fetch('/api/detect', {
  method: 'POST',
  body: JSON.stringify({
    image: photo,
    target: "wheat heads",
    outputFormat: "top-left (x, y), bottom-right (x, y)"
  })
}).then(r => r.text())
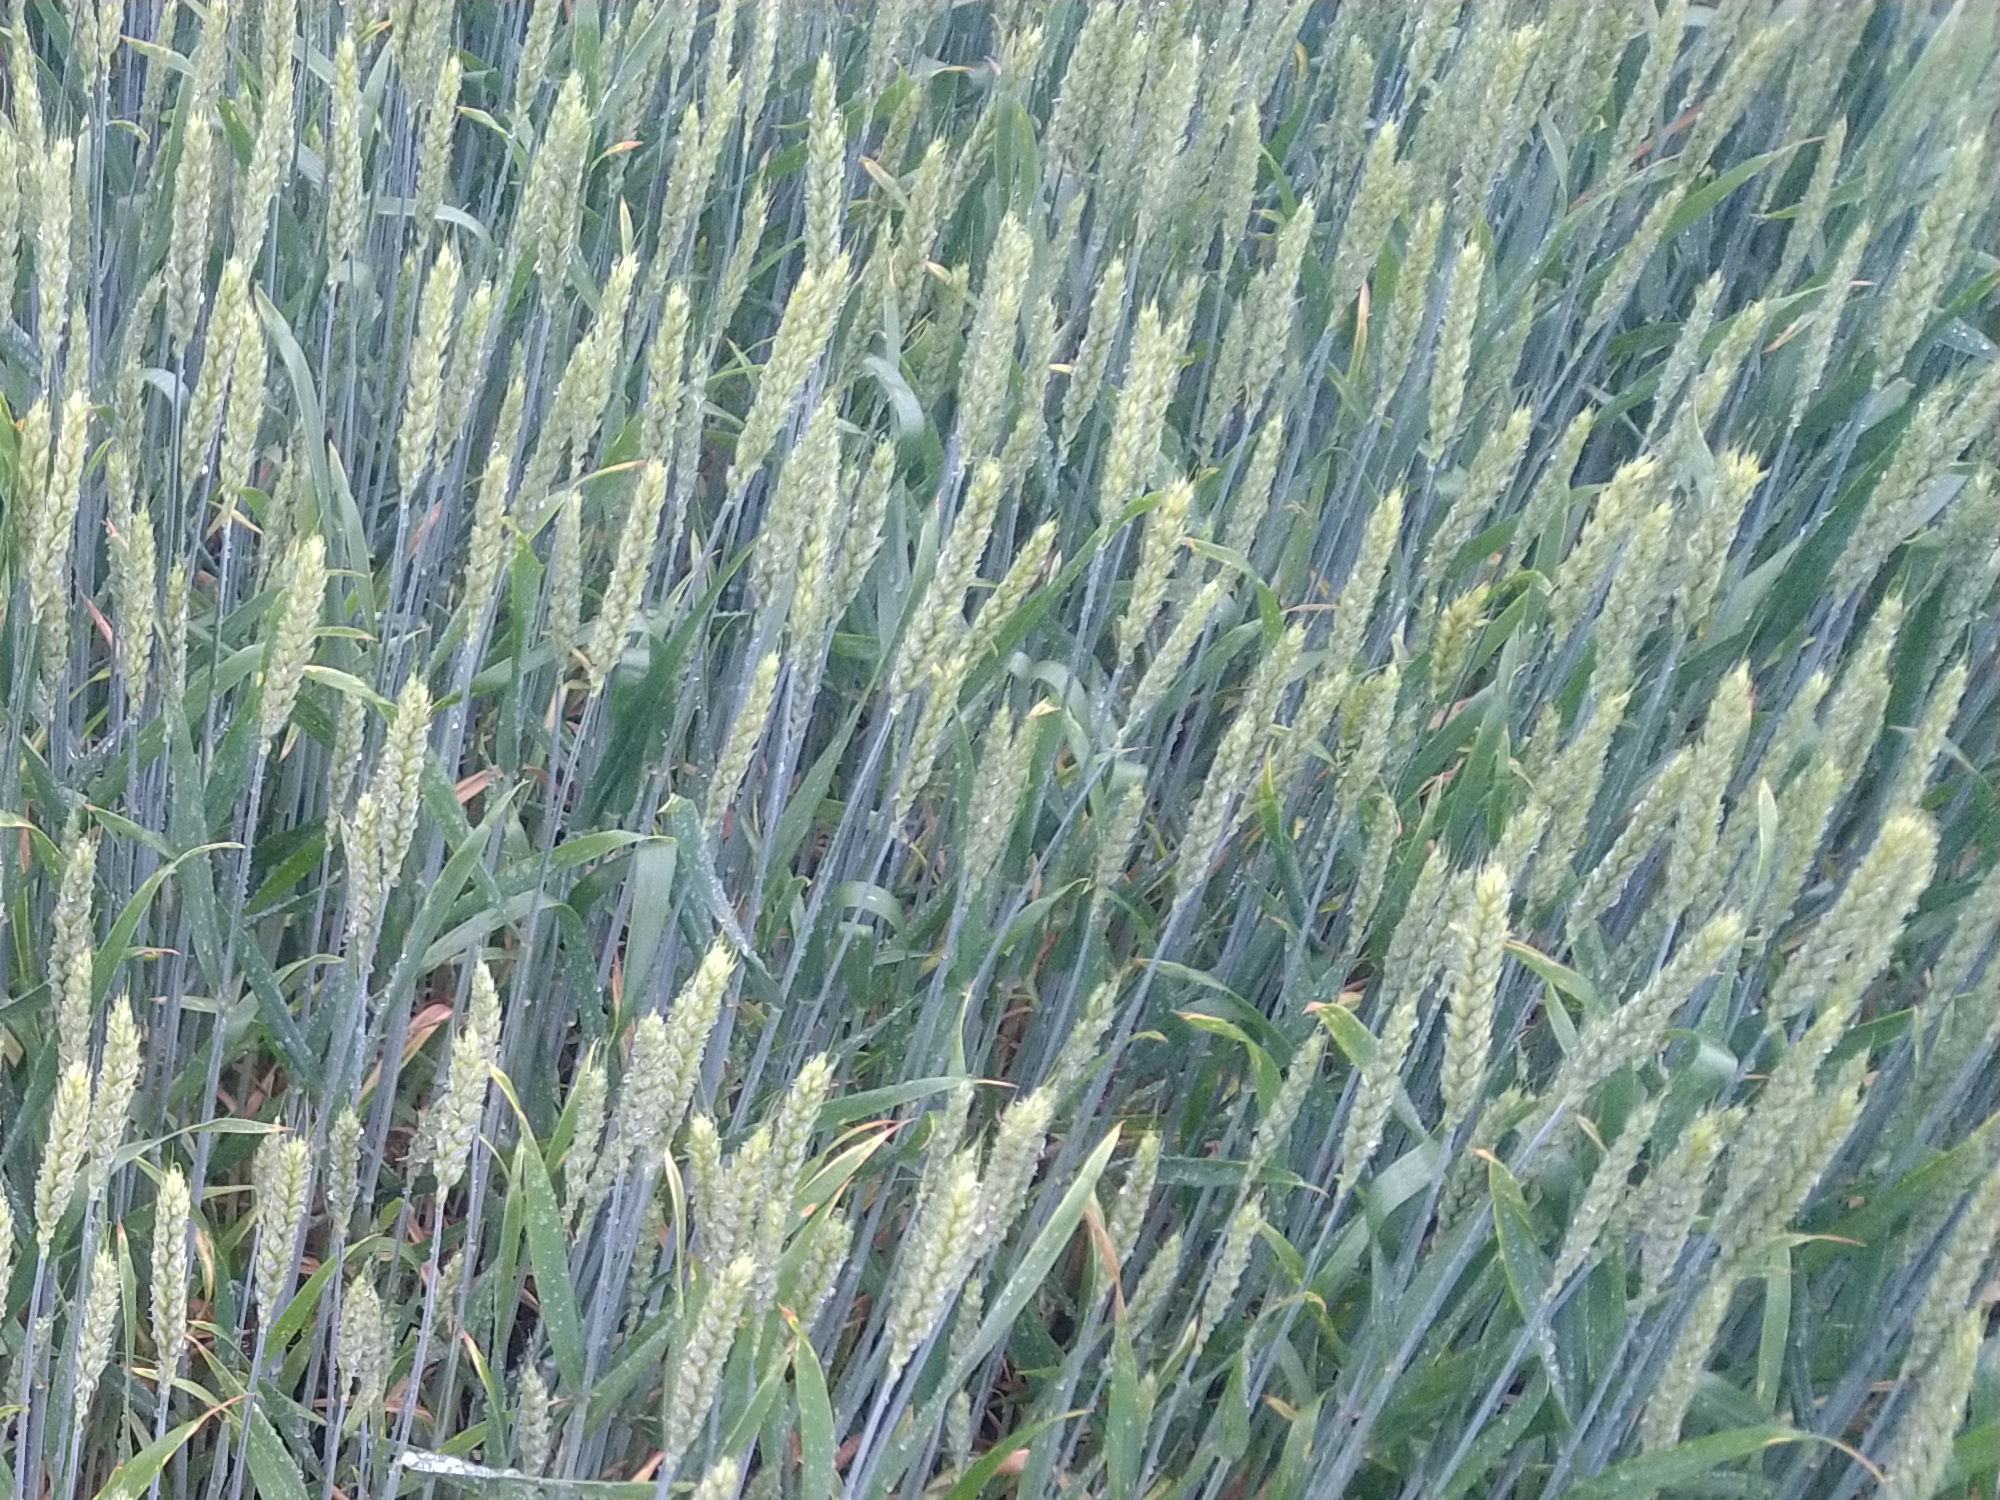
top-left (958, 223), bottom-right (1018, 397)
top-left (1597, 497), bottom-right (1676, 661)
top-left (1768, 818), bottom-right (1924, 1015)
top-left (737, 270), bottom-right (812, 467)
top-left (368, 677), bottom-right (431, 852)
top-left (1793, 228), bottom-right (1868, 404)
top-left (461, 454), bottom-right (516, 633)
top-left (1484, 23), bottom-right (1543, 126)
top-left (962, 529), bottom-right (1054, 665)
top-left (941, 101), bottom-right (998, 214)
top-left (77, 1262), bottom-right (117, 1390)
top-left (1344, 1006), bottom-right (1417, 1192)
top-left (1044, 196), bottom-right (1085, 299)
top-left (352, 1281), bottom-right (380, 1375)
top-left (61, 947), bottom-right (93, 1074)
top-left (1020, 31), bottom-right (1047, 76)
top-left (1181, 76), bottom-right (1241, 187)
top-left (1654, 274), bottom-right (1717, 419)
top-left (1773, 59), bottom-right (1828, 181)
top-left (1506, 410), bottom-right (1596, 568)
top-left (49, 844), bottom-right (96, 1020)
top-left (1454, 114), bottom-right (1520, 221)
top-left (1817, 604), bottom-right (1904, 764)
top-left (432, 1252), bottom-right (458, 1304)
top-left (704, 12), bottom-right (735, 121)
top-left (1430, 246), bottom-right (1484, 444)
top-left (1185, 183), bottom-right (1222, 258)
top-left (1066, 262), bottom-right (1128, 448)
top-left (866, 85), bottom-right (926, 228)
top-left (1895, 1112), bottom-right (2000, 1263)
top-left (1108, 32), bottom-right (1151, 146)
top-left (1725, 1033), bottom-right (1827, 1200)
top-left (640, 292), bottom-right (689, 463)
top-left (1220, 107), bottom-right (1265, 262)
top-left (1935, 965), bottom-right (2000, 1088)
top-left (777, 1216), bottom-right (855, 1357)
top-left (1244, 269), bottom-right (1267, 331)
top-left (1079, 20), bottom-right (1128, 159)
top-left (1676, 657), bottom-right (1754, 902)
top-left (786, 263), bottom-right (852, 402)
top-left (402, 262), bottom-right (457, 496)
top-left (1135, 322), bottom-right (1190, 497)
top-left (1926, 366), bottom-right (2000, 467)
top-left (1742, 1093), bottom-right (1866, 1257)
top-left (1187, 526), bottom-right (1213, 584)
top-left (919, 272), bottom-right (964, 400)
top-left (148, 1164), bottom-right (185, 1365)
top-left (1100, 307), bottom-right (1162, 516)
top-left (325, 690), bottom-right (360, 804)
top-left (14, 1317), bottom-right (53, 1403)
top-left (494, 385), bottom-right (527, 465)
top-left (1525, 711), bottom-right (1564, 790)
top-left (1257, 0), bottom-right (1315, 99)
top-left (512, 339), bottom-right (585, 529)
top-left (1381, 844), bottom-right (1449, 1001)
top-left (165, 119), bottom-right (212, 341)
top-left (711, 653), bottom-right (779, 826)
top-left (219, 309), bottom-right (270, 486)
top-left (1334, 668), bottom-right (1403, 799)
top-left (1609, 1), bottom-right (1703, 178)
top-left (607, 1014), bottom-right (665, 1181)
top-left (1530, 638), bottom-right (1622, 892)
top-left (691, 1119), bottom-right (714, 1236)
top-left (1486, 386), bottom-right (1507, 437)
top-left (672, 1459), bottom-right (735, 1500)
top-left (1684, 0), bottom-right (1742, 99)
top-left (783, 628), bottom-right (826, 758)
top-left (1870, 1020), bottom-right (1947, 1147)
top-left (182, 263), bottom-right (249, 480)
top-left (64, 301), bottom-right (91, 402)
top-left (1577, 0), bottom-right (1633, 125)
top-left (427, 0), bottom-right (453, 76)
top-left (1519, 1053), bottom-right (1579, 1127)
top-left (1216, 0), bottom-right (1255, 59)
top-left (1551, 1098), bottom-right (1645, 1281)
top-left (1345, 790), bottom-right (1396, 952)
top-left (720, 189), bottom-right (768, 330)
top-left (1566, 750), bottom-right (1697, 918)
top-left (1501, 701), bottom-right (1627, 868)
top-left (328, 1108), bottom-right (356, 1232)
top-left (686, 85), bottom-right (743, 229)
top-left (1898, 1175), bottom-right (2000, 1370)
top-left (971, 701), bottom-right (1012, 836)
top-left (11, 56), bottom-right (45, 234)
top-left (156, 566), bottom-right (189, 707)
top-left (331, 1286), bottom-right (367, 1369)
top-left (1729, 0), bottom-right (1771, 68)
top-left (239, 71), bottom-right (297, 254)
top-left (1049, 0), bottom-right (1116, 138)
top-left (954, 301), bottom-right (1023, 443)
top-left (1200, 296), bottom-right (1250, 444)
top-left (895, 155), bottom-right (945, 326)
top-left (1347, 165), bottom-right (1415, 289)
top-left (33, 1054), bottom-right (90, 1236)
top-left (1487, 410), bottom-right (1533, 466)
top-left (1558, 926), bottom-right (1744, 1090)
top-left (68, 0), bottom-right (98, 87)
top-left (1872, 50), bottom-right (1960, 179)
top-left (1314, 46), bottom-right (1337, 88)
top-left (1206, 1200), bottom-right (1264, 1318)
top-left (419, 57), bottom-right (463, 229)
top-left (1924, 534), bottom-right (2000, 684)
top-left (1835, 1048), bottom-right (1870, 1109)
top-left (1605, 892), bottom-right (1671, 977)
top-left (1677, 305), bottom-right (1768, 432)
top-left (1094, 1124), bottom-right (1161, 1302)
top-left (1680, 20), bottom-right (1798, 176)
top-left (1324, 36), bottom-right (1362, 190)
top-left (1583, 185), bottom-right (1685, 336)
top-left (1125, 1231), bottom-right (1177, 1330)
top-left (745, 0), bottom-right (784, 119)
top-left (44, 597), bottom-right (70, 696)
top-left (0, 133), bottom-right (17, 335)
top-left (1244, 201), bottom-right (1315, 416)
top-left (599, 17), bottom-right (621, 96)
top-left (1426, 454), bottom-right (1513, 586)
top-left (836, 443), bottom-right (894, 600)
top-left (1338, 51), bottom-right (1378, 203)
top-left (1637, 1279), bottom-right (1733, 1451)
top-left (436, 283), bottom-right (495, 446)
top-left (1233, 423), bottom-right (1284, 573)
top-left (1934, 470), bottom-right (1997, 563)
top-left (673, 348), bottom-right (708, 521)
top-left (1433, 1092), bottom-right (1527, 1252)
top-left (1913, 864), bottom-right (2000, 1022)
top-left (1782, 49), bottom-right (1808, 100)
top-left (1826, 406), bottom-right (1937, 596)
top-left (1136, 57), bottom-right (1200, 224)
top-left (1933, 180), bottom-right (1992, 302)
top-left (1872, 1323), bottom-right (1979, 1500)
top-left (751, 412), bottom-right (836, 596)
top-left (1101, 784), bottom-right (1143, 904)
top-left (1057, 988), bottom-right (1111, 1100)
top-left (1243, 682), bottom-right (1345, 815)
top-left (1637, 537), bottom-right (1683, 646)
top-left (1175, 717), bottom-right (1248, 883)
top-left (899, 658), bottom-right (964, 808)
top-left (1445, 0), bottom-right (1513, 135)
top-left (793, 446), bottom-right (840, 624)
top-left (397, 0), bottom-right (433, 84)
top-left (566, 1059), bottom-right (607, 1189)
top-left (1958, 60), bottom-right (2000, 145)
top-left (1016, 231), bottom-right (1036, 288)
top-left (803, 56), bottom-right (843, 265)
top-left (341, 819), bottom-right (382, 947)
top-left (1454, 320), bottom-right (1529, 444)
top-left (1514, 5), bottom-right (1577, 134)
top-left (1242, 1028), bottom-right (1324, 1190)
top-left (505, 81), bottom-right (579, 275)
top-left (1763, 59), bottom-right (1790, 96)
top-left (659, 947), bottom-right (731, 1116)
top-left (891, 466), bottom-right (1005, 700)
top-left (469, 962), bottom-right (503, 1059)
top-left (328, 109), bottom-right (360, 269)
top-left (537, 118), bottom-right (592, 280)
top-left (1555, 462), bottom-right (1658, 635)
top-left (843, 272), bottom-right (893, 371)
top-left (608, 59), bottom-right (642, 168)
top-left (1405, 871), bottom-right (1465, 988)
top-left (1854, 289), bottom-right (1891, 354)
top-left (1868, 141), bottom-right (1983, 376)
top-left (998, 426), bottom-right (1041, 487)
top-left (1896, 0), bottom-right (1931, 58)
top-left (37, 145), bottom-right (72, 354)
top-left (261, 538), bottom-right (324, 737)
top-left (916, 1090), bottom-right (968, 1160)
top-left (111, 363), bottom-right (141, 476)
top-left (949, 1388), bottom-right (971, 1467)
top-left (432, 1030), bottom-right (477, 1181)
top-left (334, 40), bottom-right (363, 112)
top-left (1129, 591), bottom-right (1222, 715)
top-left (966, 719), bottom-right (1039, 907)
top-left (626, 1205), bottom-right (660, 1305)
top-left (12, 400), bottom-right (49, 536)
top-left (1241, 0), bottom-right (1293, 51)
top-left (1429, 578), bottom-right (1492, 698)
top-left (513, 0), bottom-right (559, 106)
top-left (658, 102), bottom-right (698, 250)
top-left (98, 0), bottom-right (121, 54)
top-left (83, 998), bottom-right (138, 1192)
top-left (1694, 695), bottom-right (1823, 917)
top-left (123, 505), bottom-right (155, 711)
top-left (882, 1158), bottom-right (976, 1349)
top-left (1571, 902), bottom-right (1611, 1040)
top-left (667, 0), bottom-right (700, 60)
top-left (265, 0), bottom-right (294, 98)
top-left (255, 1140), bottom-right (310, 1328)
top-left (1403, 97), bottom-right (1458, 220)
top-left (1232, 629), bottom-right (1308, 782)
top-left (1300, 798), bottom-right (1349, 876)
top-left (1669, 458), bottom-right (1763, 632)
top-left (250, 1116), bottom-right (291, 1189)
top-left (1122, 494), bottom-right (1191, 655)
top-left (230, 89), bottom-right (257, 225)
top-left (1337, 126), bottom-right (1400, 265)
top-left (1763, 117), bottom-right (1846, 297)
top-left (1190, 113), bottom-right (1253, 228)
top-left (27, 393), bottom-right (94, 600)
top-left (704, 1127), bottom-right (770, 1276)
top-left (1827, 837), bottom-right (1937, 1025)
top-left (1433, 874), bottom-right (1511, 1111)
top-left (971, 1092), bottom-right (1054, 1244)
top-left (1407, 0), bottom-right (1463, 78)
top-left (1095, 125), bottom-right (1139, 202)
top-left (574, 263), bottom-right (637, 453)
top-left (0, 1190), bottom-right (19, 1369)
top-left (1751, 764), bottom-right (1838, 926)
top-left (550, 496), bottom-right (583, 636)
top-left (107, 457), bottom-right (133, 609)
top-left (516, 1365), bottom-right (548, 1477)
top-left (757, 1053), bottom-right (835, 1215)
top-left (1326, 487), bottom-right (1407, 666)
top-left (1358, 13), bottom-right (1405, 55)
top-left (594, 464), bottom-right (667, 665)
top-left (1880, 667), bottom-right (1961, 813)
top-left (121, 276), bottom-right (161, 372)
top-left (200, 0), bottom-right (226, 79)
top-left (1378, 204), bottom-right (1446, 397)
top-left (1023, 297), bottom-right (1056, 418)
top-left (1645, 1121), bottom-right (1725, 1292)
top-left (667, 1263), bottom-right (738, 1446)
top-left (141, 11), bottom-right (175, 134)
